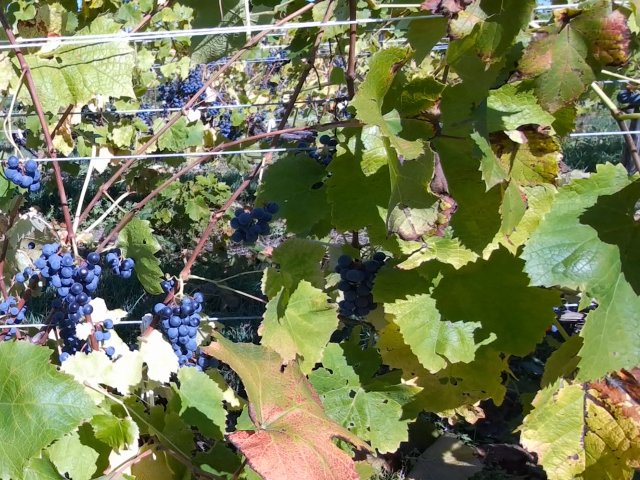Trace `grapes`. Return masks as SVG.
<instances>
[{
	"label": "grapes",
	"instance_id": "6",
	"mask_svg": "<svg viewBox=\"0 0 640 480\" xmlns=\"http://www.w3.org/2000/svg\"><path fill=\"white\" fill-rule=\"evenodd\" d=\"M17 299L14 296H8L7 301L0 303V315H15V319H6L5 323H22L25 320V314L27 313V306L23 305L21 309L15 306Z\"/></svg>",
	"mask_w": 640,
	"mask_h": 480
},
{
	"label": "grapes",
	"instance_id": "4",
	"mask_svg": "<svg viewBox=\"0 0 640 480\" xmlns=\"http://www.w3.org/2000/svg\"><path fill=\"white\" fill-rule=\"evenodd\" d=\"M16 156L7 158L4 175L22 189L38 191L40 189L41 172L37 170V163L19 164Z\"/></svg>",
	"mask_w": 640,
	"mask_h": 480
},
{
	"label": "grapes",
	"instance_id": "2",
	"mask_svg": "<svg viewBox=\"0 0 640 480\" xmlns=\"http://www.w3.org/2000/svg\"><path fill=\"white\" fill-rule=\"evenodd\" d=\"M205 297L202 292H194L192 299L184 297L181 305H166L156 303L154 313L161 317V324L166 328L168 340L174 348L180 367H192L199 373H204L206 367L217 368L219 360L197 347L194 338L198 336L200 313Z\"/></svg>",
	"mask_w": 640,
	"mask_h": 480
},
{
	"label": "grapes",
	"instance_id": "5",
	"mask_svg": "<svg viewBox=\"0 0 640 480\" xmlns=\"http://www.w3.org/2000/svg\"><path fill=\"white\" fill-rule=\"evenodd\" d=\"M120 254L121 250L116 249L115 251L107 253L104 256V260L106 263L111 264V269L114 271L115 275H119L122 278H131L133 276L135 261L132 257H125L124 261L120 262Z\"/></svg>",
	"mask_w": 640,
	"mask_h": 480
},
{
	"label": "grapes",
	"instance_id": "3",
	"mask_svg": "<svg viewBox=\"0 0 640 480\" xmlns=\"http://www.w3.org/2000/svg\"><path fill=\"white\" fill-rule=\"evenodd\" d=\"M280 210V205L276 201L269 202L266 209L255 208L245 212L244 209H236L234 216L230 219L229 226L236 229L232 235L234 242L252 243L258 240L259 235L269 234V221L272 214Z\"/></svg>",
	"mask_w": 640,
	"mask_h": 480
},
{
	"label": "grapes",
	"instance_id": "1",
	"mask_svg": "<svg viewBox=\"0 0 640 480\" xmlns=\"http://www.w3.org/2000/svg\"><path fill=\"white\" fill-rule=\"evenodd\" d=\"M59 243L44 244L42 254L34 260V266L40 269L34 273L31 266H27L23 273L15 274L17 283H24L26 277L37 279L40 275L50 287H56L57 298L52 301V307L57 309L52 315V320L59 323V337L66 344L59 354L58 361L65 362L68 356H73L77 348L85 346L84 354L89 355L92 347L85 345L83 339L77 338V323L81 315L87 316L94 313V307L89 304L92 301V291H96L100 284L102 269L99 265L100 255L89 252L86 260L80 267L76 266L75 256L70 253H60Z\"/></svg>",
	"mask_w": 640,
	"mask_h": 480
}]
</instances>
